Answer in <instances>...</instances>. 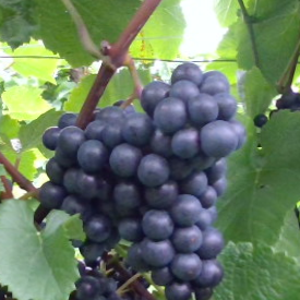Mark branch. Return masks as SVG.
<instances>
[{"label": "branch", "mask_w": 300, "mask_h": 300, "mask_svg": "<svg viewBox=\"0 0 300 300\" xmlns=\"http://www.w3.org/2000/svg\"><path fill=\"white\" fill-rule=\"evenodd\" d=\"M160 3L161 0H144L115 44H111L108 40H102L99 50V47L93 42L90 32L87 30L86 25L83 23L74 5L68 0L63 1V4L67 7L68 12L78 27L79 37L84 48L93 56L102 60L98 76L90 88L83 107L79 111V117L77 119L79 126L84 127L85 123L92 119V112L115 70L121 65L122 60L127 55L129 45L136 35L140 33Z\"/></svg>", "instance_id": "30e6481e"}, {"label": "branch", "mask_w": 300, "mask_h": 300, "mask_svg": "<svg viewBox=\"0 0 300 300\" xmlns=\"http://www.w3.org/2000/svg\"><path fill=\"white\" fill-rule=\"evenodd\" d=\"M21 161L22 158L20 156H16L11 162L6 155L0 152V164L8 174V178L5 175L0 177V181L5 188V192H0V199L10 200L13 197L12 188L14 187V182L28 194H33L35 192V189L29 183L28 179L20 171H18Z\"/></svg>", "instance_id": "325d2c04"}]
</instances>
